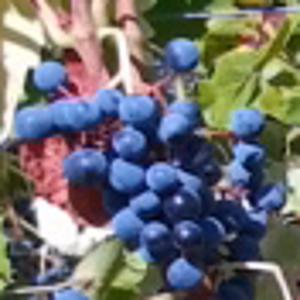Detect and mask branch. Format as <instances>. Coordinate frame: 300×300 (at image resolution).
I'll use <instances>...</instances> for the list:
<instances>
[{"mask_svg":"<svg viewBox=\"0 0 300 300\" xmlns=\"http://www.w3.org/2000/svg\"><path fill=\"white\" fill-rule=\"evenodd\" d=\"M139 4L137 0H118L115 6V18L118 29L127 37V66L133 92L143 93L141 62L139 58Z\"/></svg>","mask_w":300,"mask_h":300,"instance_id":"branch-2","label":"branch"},{"mask_svg":"<svg viewBox=\"0 0 300 300\" xmlns=\"http://www.w3.org/2000/svg\"><path fill=\"white\" fill-rule=\"evenodd\" d=\"M88 11L86 0H73L70 6L71 38L84 71L87 88L96 90L106 84L108 71L101 57V31Z\"/></svg>","mask_w":300,"mask_h":300,"instance_id":"branch-1","label":"branch"}]
</instances>
